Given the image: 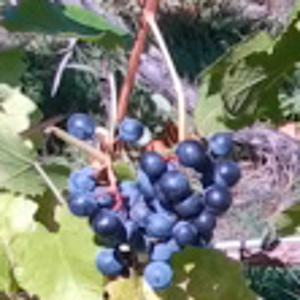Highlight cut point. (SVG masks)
<instances>
[{
    "label": "cut point",
    "instance_id": "obj_1",
    "mask_svg": "<svg viewBox=\"0 0 300 300\" xmlns=\"http://www.w3.org/2000/svg\"><path fill=\"white\" fill-rule=\"evenodd\" d=\"M147 22L155 32V36L159 42L162 56L166 64L168 65L172 75V80L174 83V92L178 101V135L180 137H183L185 135V98L181 89V80L179 77V72L177 66L175 65L173 59L170 56L166 39L162 33L160 26L157 24L156 20L153 17H149L147 19Z\"/></svg>",
    "mask_w": 300,
    "mask_h": 300
}]
</instances>
